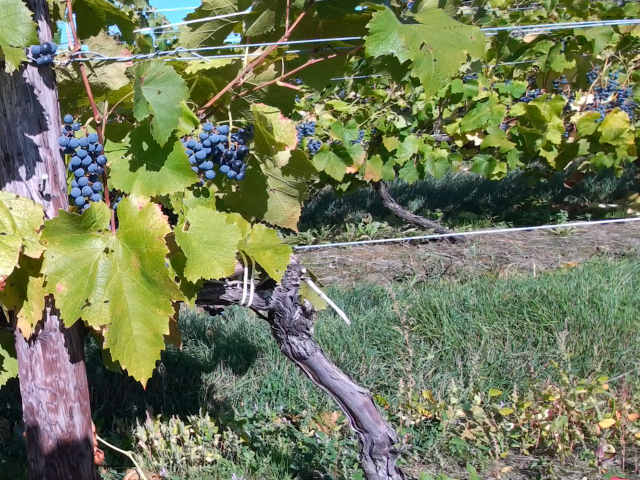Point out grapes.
<instances>
[{
	"label": "grapes",
	"instance_id": "obj_1",
	"mask_svg": "<svg viewBox=\"0 0 640 480\" xmlns=\"http://www.w3.org/2000/svg\"><path fill=\"white\" fill-rule=\"evenodd\" d=\"M202 132L199 135L200 141L195 139L187 140L185 137L180 142L185 148V154L189 156L187 162L192 165V170L198 172L204 170V177L213 180L216 172L213 170L214 164L218 165L221 174H227L229 179L243 181L246 178V164L244 157L249 154L246 145L248 140L254 138V126L249 124L246 128H238L237 132L230 134V144L227 133V124L215 126L211 122L202 124Z\"/></svg>",
	"mask_w": 640,
	"mask_h": 480
},
{
	"label": "grapes",
	"instance_id": "obj_2",
	"mask_svg": "<svg viewBox=\"0 0 640 480\" xmlns=\"http://www.w3.org/2000/svg\"><path fill=\"white\" fill-rule=\"evenodd\" d=\"M64 125L61 129L59 145L64 147L66 153L73 152L69 158L67 165V173L75 175L72 178L70 190V198L75 200V205L79 212L88 211L91 203L86 201L85 197H89L91 201H101L103 194V183L98 181V176L104 173V167L108 164V156L101 154L104 151V145L98 143L97 133H89L87 137L69 138L73 132H79L82 129L80 122H74L72 115L64 117Z\"/></svg>",
	"mask_w": 640,
	"mask_h": 480
}]
</instances>
